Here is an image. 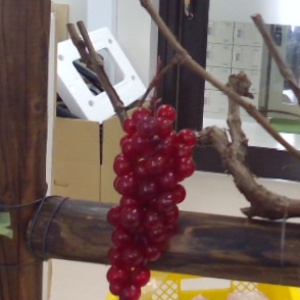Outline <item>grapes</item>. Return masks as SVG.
<instances>
[{
    "label": "grapes",
    "instance_id": "01657485",
    "mask_svg": "<svg viewBox=\"0 0 300 300\" xmlns=\"http://www.w3.org/2000/svg\"><path fill=\"white\" fill-rule=\"evenodd\" d=\"M177 111L159 105L156 116L139 107L126 117L119 139L122 148L113 161L117 175L113 190L121 194L119 206L107 211V222L115 228L110 235L114 248L107 250L112 264L107 270L109 291L119 300H139L152 277L147 261L161 259L172 235L179 232V208L186 200L180 184L196 172L194 147L197 136L191 128L175 132L171 124Z\"/></svg>",
    "mask_w": 300,
    "mask_h": 300
}]
</instances>
